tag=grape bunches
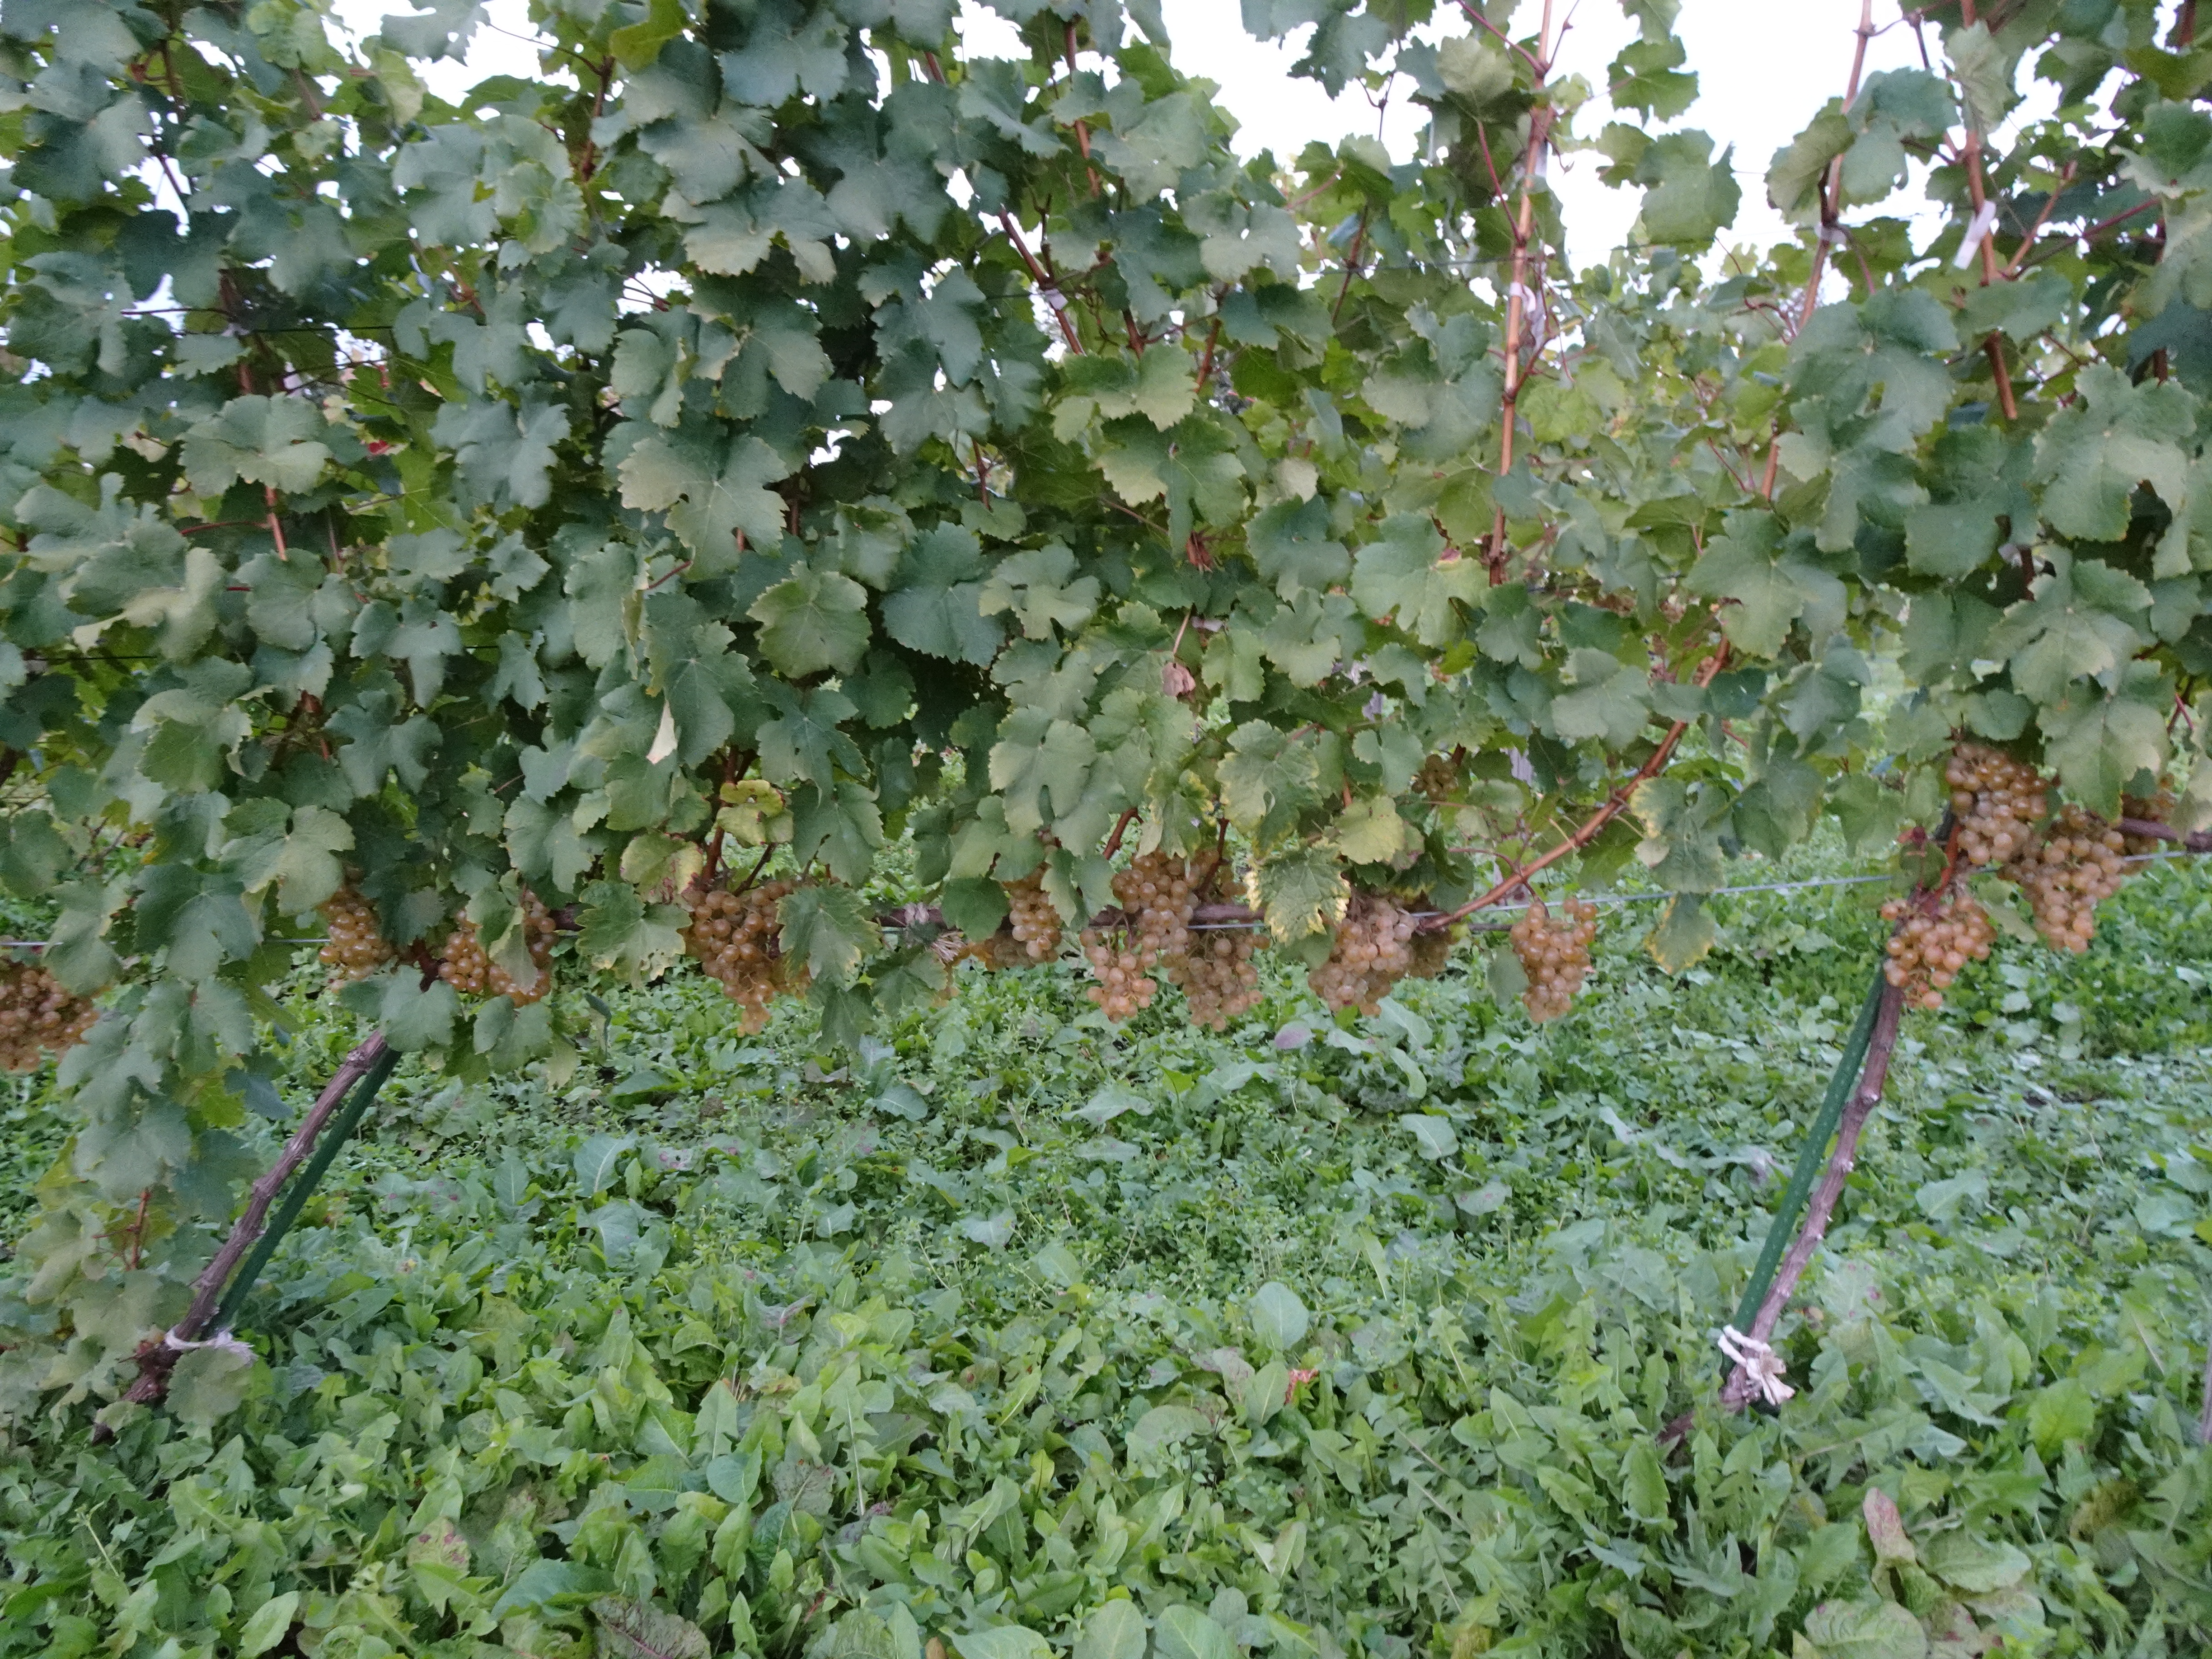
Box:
[750,878,816,1001]
[0,947,53,1072]
[439,906,489,994]
[682,869,781,1038]
[318,906,394,981]
[1509,894,1597,1024]
[1161,847,1270,975]
[2020,805,2131,956]
[1359,968,1391,1018]
[1881,897,1975,1010]
[310,865,374,923]
[1954,896,1997,960]
[1009,862,1062,957]
[1160,928,1272,1032]
[1321,900,1418,975]
[1079,928,1158,1024]
[1944,741,2047,866]
[1401,891,1453,980]
[969,932,1063,970]
[1111,844,1198,969]
[1308,916,1371,1017]
[1411,754,1458,801]
[484,953,555,1006]
[517,891,567,975]
[932,959,959,1009]
[2115,767,2175,875]
[37,968,121,1065]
